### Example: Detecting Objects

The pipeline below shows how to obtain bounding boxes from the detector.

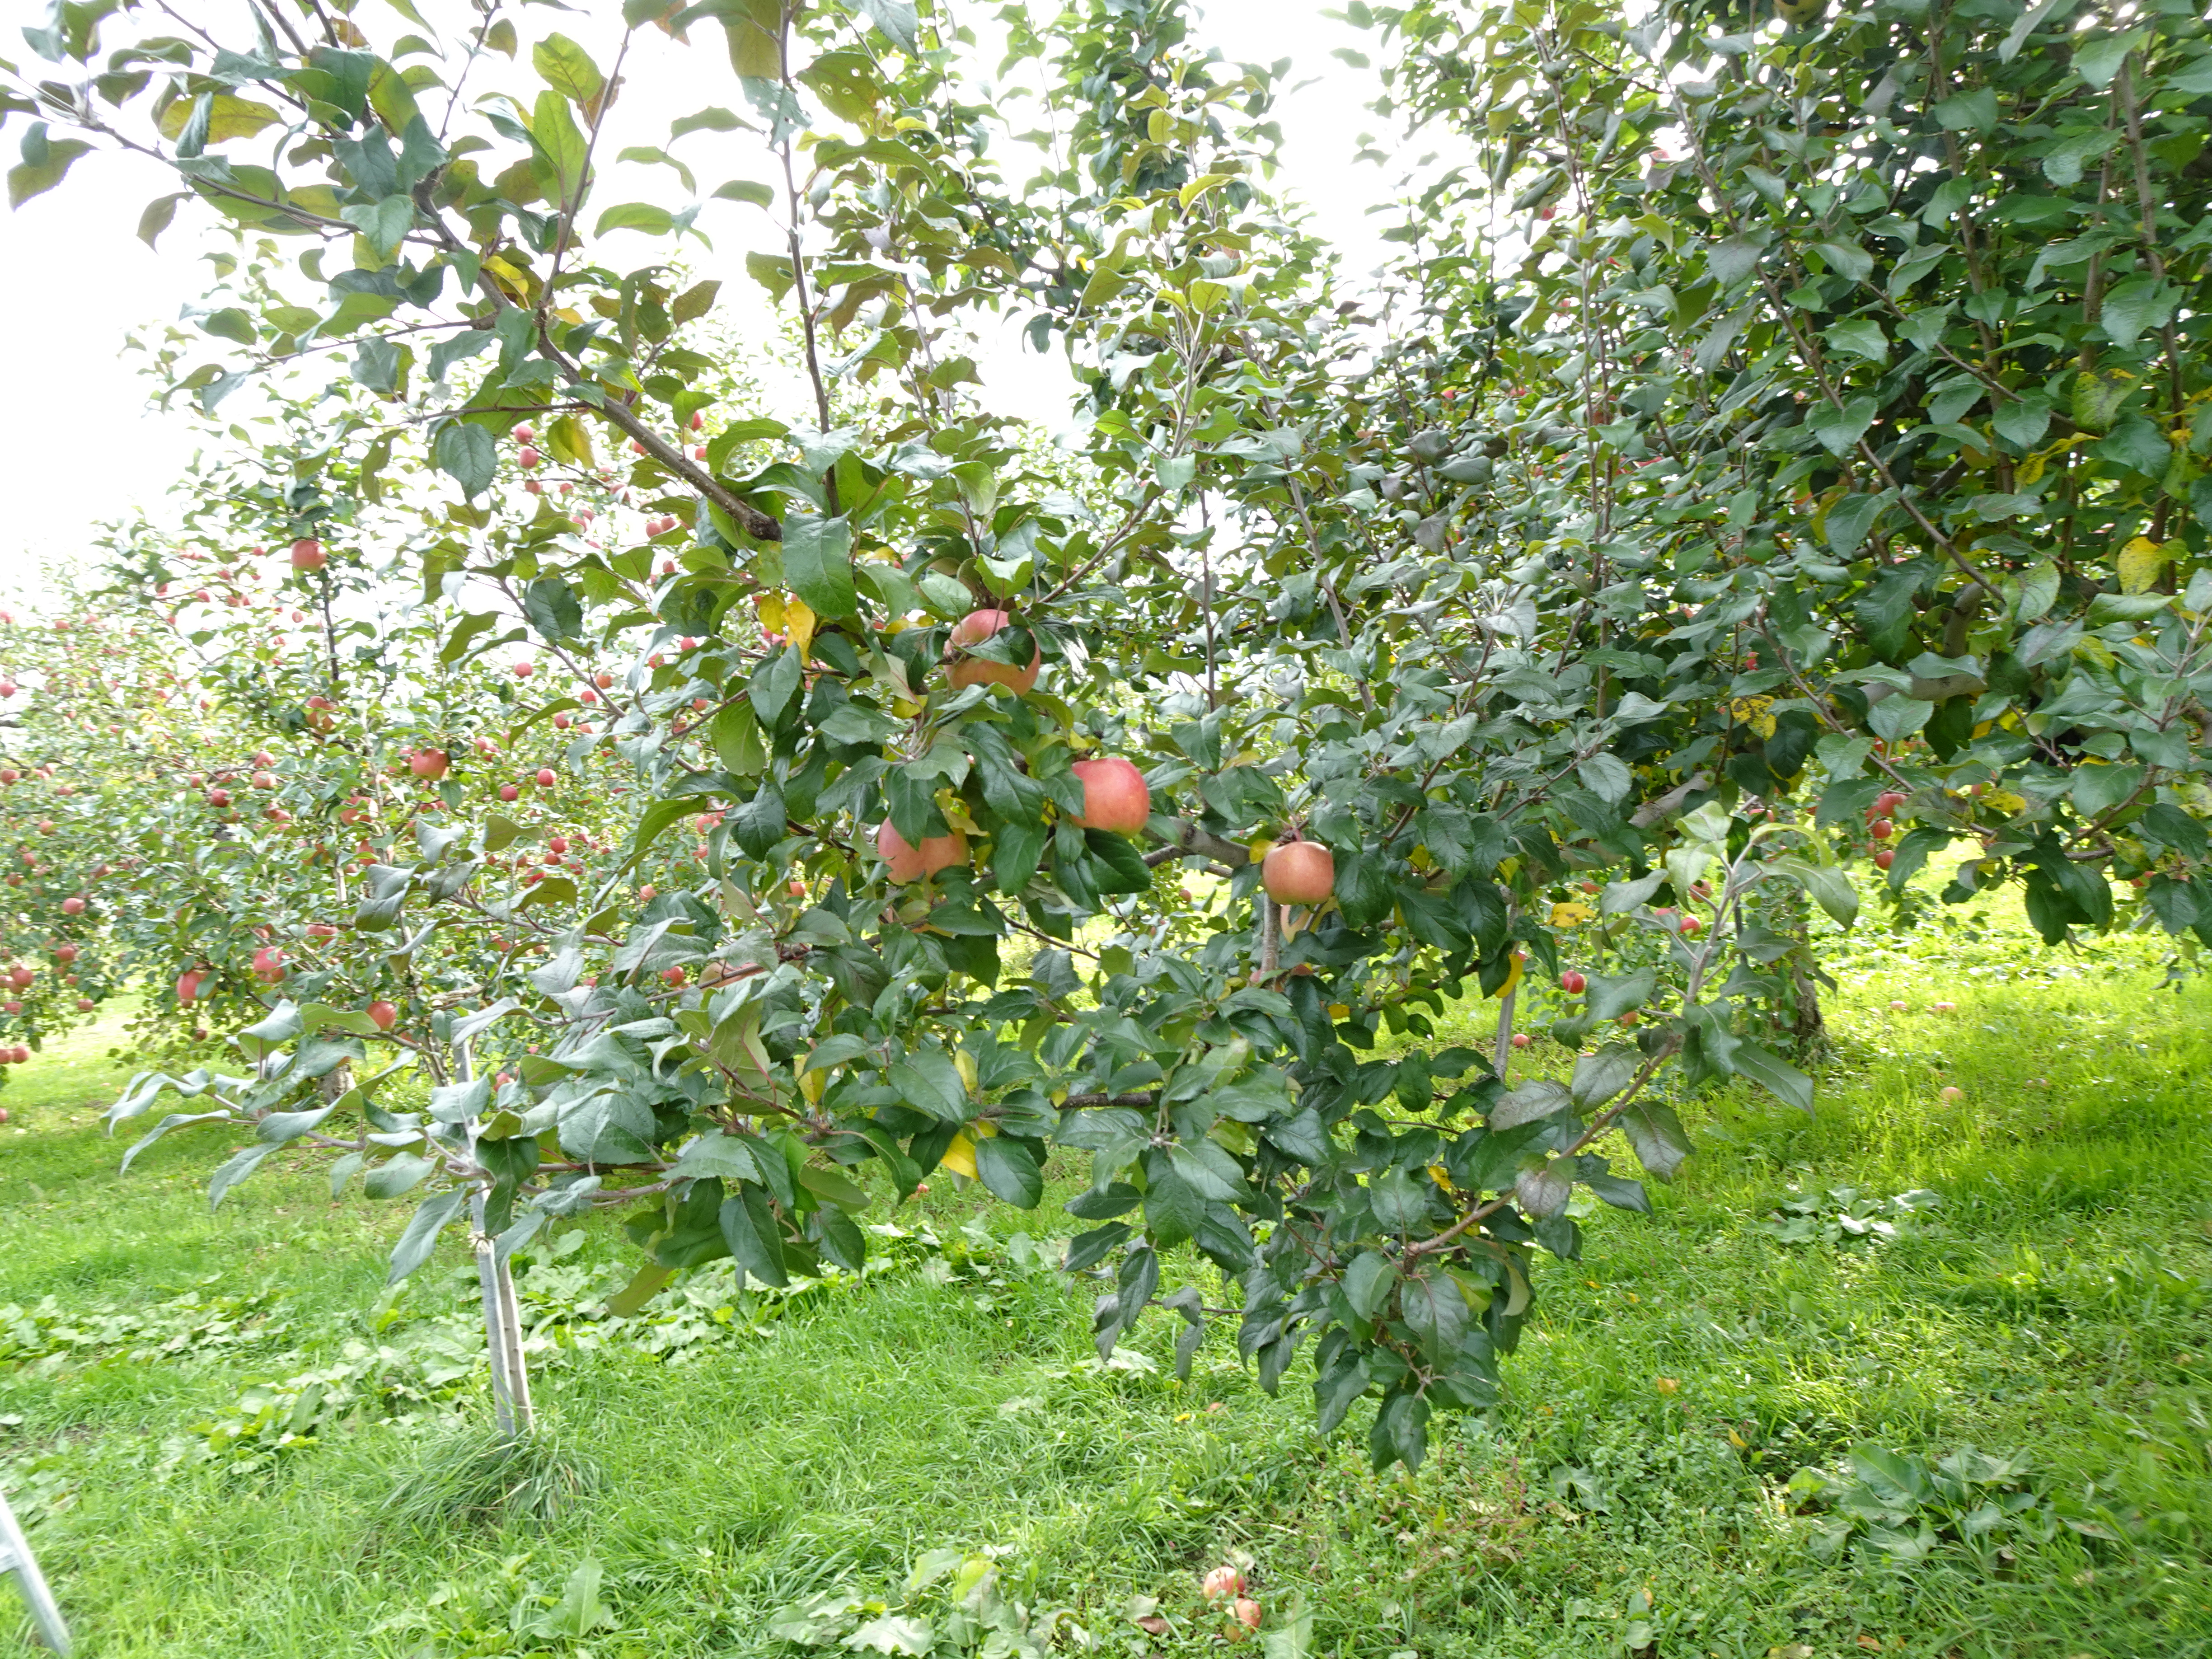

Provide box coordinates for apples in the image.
[1687,873,1721,903]
[1675,342,1699,361]
[947,752,996,811]
[1436,526,1466,551]
[1609,458,1638,489]
[1606,243,1640,267]
[1715,700,1738,725]
[2130,868,2157,893]
[868,613,890,632]
[1744,806,1777,833]
[1348,427,1392,472]
[874,806,977,888]
[1834,476,1880,514]
[1634,451,1665,483]
[777,879,806,907]
[709,894,742,922]
[1784,484,1822,517]
[1165,885,1197,909]
[1512,940,1534,963]
[1875,848,1900,873]
[1060,757,1150,844]
[1278,888,1347,953]
[1875,790,1911,817]
[2170,869,2193,891]
[1665,482,1707,520]
[1434,381,1477,424]
[1149,917,1176,941]
[1408,840,1453,884]
[1772,528,1795,552]
[1261,839,1338,908]
[891,552,917,575]
[1978,822,2016,856]
[1720,532,1767,576]
[1551,294,1576,321]
[875,877,963,945]
[1647,146,1671,173]
[1204,244,1243,280]
[1671,601,1700,631]
[1071,561,1090,579]
[1740,648,1774,675]
[1285,960,1313,990]
[1972,767,2000,800]
[1651,904,1680,933]
[1511,1030,1532,1053]
[1629,348,1664,379]
[1589,393,1627,428]
[1609,1005,1640,1032]
[1883,539,1904,558]
[1138,479,1160,500]
[1793,388,1810,409]
[1800,791,1829,815]
[1508,381,1531,405]
[1891,555,1914,583]
[942,607,1041,701]
[1865,820,1893,841]
[771,936,811,971]
[1528,641,1545,657]
[1510,464,1545,492]
[1583,873,1610,898]
[1561,966,1589,995]
[1468,490,1493,515]
[698,960,769,1019]
[905,1180,934,1204]
[1675,914,1711,942]
[1998,551,2020,575]
[1552,451,1579,477]
[1869,733,1904,759]
[521,1040,574,1084]
[1248,968,1297,1008]
[493,1069,535,1111]
[1530,194,1561,224]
